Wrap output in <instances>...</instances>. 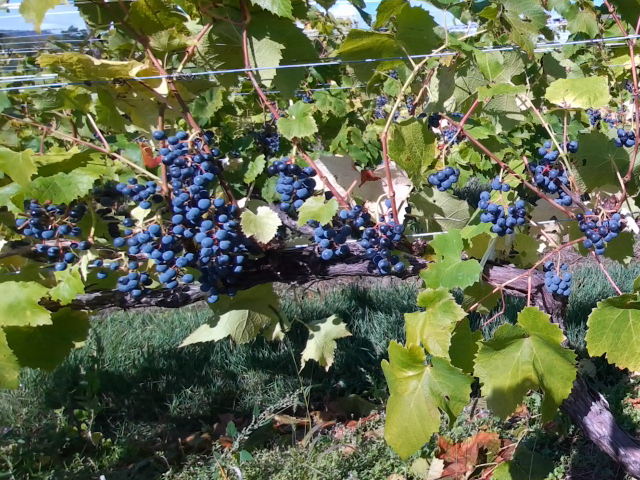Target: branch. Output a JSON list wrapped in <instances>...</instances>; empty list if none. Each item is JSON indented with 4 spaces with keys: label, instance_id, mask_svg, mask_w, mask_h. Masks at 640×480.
Wrapping results in <instances>:
<instances>
[{
    "label": "branch",
    "instance_id": "branch-1",
    "mask_svg": "<svg viewBox=\"0 0 640 480\" xmlns=\"http://www.w3.org/2000/svg\"><path fill=\"white\" fill-rule=\"evenodd\" d=\"M428 61H429V58H423L422 61H420L413 68L411 74L405 80V84L402 85V87L400 89V92H399V96L397 97V100L394 103V106L392 107V111H391L390 116L388 118V122L386 123V125H385V127H384V129L382 131V150H383V154H384V167H385V172H386L388 193H389V197H390V201H391V205H392V213H393V221L394 222H398L399 218H398L397 203H396V199H395V195H394L395 189L393 187L391 169H390V164H389V152H388V148H387V134H388V131L391 128V125L393 124L395 115L397 113V109L399 108V106H400V104L402 102V99L404 98V94H405L408 86L410 85L412 80L415 78V76L418 73V71Z\"/></svg>",
    "mask_w": 640,
    "mask_h": 480
},
{
    "label": "branch",
    "instance_id": "branch-2",
    "mask_svg": "<svg viewBox=\"0 0 640 480\" xmlns=\"http://www.w3.org/2000/svg\"><path fill=\"white\" fill-rule=\"evenodd\" d=\"M438 116L447 119L459 131L464 133L465 136L472 143H474L477 147H479L481 150H483L490 159H492L496 163H499L500 165H502L505 168V170L508 171L515 179H518V180L522 181L530 191L538 194L541 197L542 200L547 202L549 205L561 210L562 212H564L568 216H576V214L573 213L572 211H570L568 208H566L565 206L561 205L560 203L555 202L551 198L547 197L544 194L543 191H541L540 189L534 187L530 183V181L526 179L525 176H522V175L518 174L516 171H514V169L512 167H510V165L507 162H505L501 158H498L496 155H494L484 144H482L474 136H472V134L466 128H464L460 123H458L454 118H452V116L450 114H448L446 112H439Z\"/></svg>",
    "mask_w": 640,
    "mask_h": 480
},
{
    "label": "branch",
    "instance_id": "branch-3",
    "mask_svg": "<svg viewBox=\"0 0 640 480\" xmlns=\"http://www.w3.org/2000/svg\"><path fill=\"white\" fill-rule=\"evenodd\" d=\"M626 42L629 46V57L631 60V76H632V83H633L634 107L636 111V143H635L632 157H631V160L629 161L627 171L624 177V187L620 194V198L617 200L614 206L615 212L619 211L621 204H623L625 201V196L629 188V179H630L634 164L636 163L637 155L640 149V105H639L638 81H637V74H636V58L634 54L633 41L630 38H627Z\"/></svg>",
    "mask_w": 640,
    "mask_h": 480
},
{
    "label": "branch",
    "instance_id": "branch-4",
    "mask_svg": "<svg viewBox=\"0 0 640 480\" xmlns=\"http://www.w3.org/2000/svg\"><path fill=\"white\" fill-rule=\"evenodd\" d=\"M111 155L118 157L121 161L125 162L126 164L130 165L131 167H133L135 170L139 171L140 173L153 178L155 181H157L158 184H160L161 187V195L165 196L166 198V206L168 209L172 208V204H171V188L168 187V181L166 178V173H167V166L164 163L160 164V173H161V178H159L156 175L151 174L150 172L146 171L145 169H143L142 167H140L137 164L132 163L131 161L127 160L126 158H124L123 156H121L118 153L115 152H111Z\"/></svg>",
    "mask_w": 640,
    "mask_h": 480
},
{
    "label": "branch",
    "instance_id": "branch-5",
    "mask_svg": "<svg viewBox=\"0 0 640 480\" xmlns=\"http://www.w3.org/2000/svg\"><path fill=\"white\" fill-rule=\"evenodd\" d=\"M586 239H587V236H584V237H582V238H580V239H577V240H574V241L568 242V243L564 244L563 246L558 247V248H556V249L552 250V251H551V252H549L547 255H545L544 257H542V258H541V259H540L536 264H534V265L532 266V268H531V269L527 270L526 272H524V273L520 274V275H519V276H517V277H514V278H512V279L508 280L506 283H504V284H503V285H501L500 287H498V288H495V289L491 290V291H490L487 295H485V296H484L480 301H478V302H477V303H475L473 306H471L468 310H466V313H471L474 309H476L478 306H480L482 303H484V302H485V301H486V300H487L491 295H493L494 293H496V292H498V291H500V290H503L505 287L509 286L511 283H513V282H515V281H517V280H519V279L523 278L524 276H526V275L530 274L531 272L535 271V269H536V268H537V267H538V266H539V265H540L544 260L548 259V258H549L550 256H552L553 254H555V253L559 252L560 250H563V249L567 248L568 246H571V245H574V244H576V243L582 242V241H584V240H586Z\"/></svg>",
    "mask_w": 640,
    "mask_h": 480
},
{
    "label": "branch",
    "instance_id": "branch-6",
    "mask_svg": "<svg viewBox=\"0 0 640 480\" xmlns=\"http://www.w3.org/2000/svg\"><path fill=\"white\" fill-rule=\"evenodd\" d=\"M102 8L111 17L115 18L117 22L122 24L129 31V33L144 47L147 55L149 56V59L162 73L168 72L167 69L156 59L153 52L151 51V48L149 47V44L137 32L134 31L132 26L126 20L122 19L120 15L113 12L106 4H103Z\"/></svg>",
    "mask_w": 640,
    "mask_h": 480
},
{
    "label": "branch",
    "instance_id": "branch-7",
    "mask_svg": "<svg viewBox=\"0 0 640 480\" xmlns=\"http://www.w3.org/2000/svg\"><path fill=\"white\" fill-rule=\"evenodd\" d=\"M292 142H293V144L297 147V150H298L299 154L301 155L302 159L307 163V165H308L309 167L314 168V169L317 171V174H316V175L318 176V178L320 179V181H321V182H323V183L328 187V189L330 190V192H331V193H333V194L335 195V197L338 199V203H339L340 205H342V208H343V209H348V208H349V205L347 204V201L342 197V195L340 194V192H339V191H337V190L333 187V185L331 184V182H330L329 180H327V179L324 177V175L322 174V172H321L320 168H319L317 165H315V164L311 161V159L306 155V153H305V151H304V149H303V147H302L301 143L297 140V138H296V137H293V138H292Z\"/></svg>",
    "mask_w": 640,
    "mask_h": 480
},
{
    "label": "branch",
    "instance_id": "branch-8",
    "mask_svg": "<svg viewBox=\"0 0 640 480\" xmlns=\"http://www.w3.org/2000/svg\"><path fill=\"white\" fill-rule=\"evenodd\" d=\"M167 82L173 92V95L175 97V99L177 100L180 108L182 109L183 113L185 114V116L187 117V119L189 120V122L192 124L194 130L196 131V133L198 134V138L199 140L202 142V149L206 152V153H210L211 149L205 145L204 143V136H203V131L200 129L199 125L197 124L196 120L193 118L192 114L188 111L185 103L183 102L181 96L178 93L177 87L175 86L174 81L171 78L167 79Z\"/></svg>",
    "mask_w": 640,
    "mask_h": 480
},
{
    "label": "branch",
    "instance_id": "branch-9",
    "mask_svg": "<svg viewBox=\"0 0 640 480\" xmlns=\"http://www.w3.org/2000/svg\"><path fill=\"white\" fill-rule=\"evenodd\" d=\"M1 116H3V117H7V118H10V119H13V120H15V121H19V122L24 123V124H28V125H31V126L39 127V128H41V129H44V130L49 131V132H51V133H55L56 135L63 136V137H65V138H67V139H70V140H72V141L78 142V143H80V144H84V145H87V146H90V147L96 148V149L101 150V151H103V152H108V149H106V148H104V147H101V146L95 145V144L90 143V142L82 141V140H80V139H78V138H75V137H73V136L67 135V134L62 133V132H59V131H57V130H54V129L48 128V127H46V126H44V125H41V124H38V123H33V122H30V121H27V120H23V119H21V118L15 117V116H13V115L5 114V113H1Z\"/></svg>",
    "mask_w": 640,
    "mask_h": 480
},
{
    "label": "branch",
    "instance_id": "branch-10",
    "mask_svg": "<svg viewBox=\"0 0 640 480\" xmlns=\"http://www.w3.org/2000/svg\"><path fill=\"white\" fill-rule=\"evenodd\" d=\"M241 14L243 23V57L245 59V66H250V57L248 55V21L245 2L241 3Z\"/></svg>",
    "mask_w": 640,
    "mask_h": 480
},
{
    "label": "branch",
    "instance_id": "branch-11",
    "mask_svg": "<svg viewBox=\"0 0 640 480\" xmlns=\"http://www.w3.org/2000/svg\"><path fill=\"white\" fill-rule=\"evenodd\" d=\"M246 75L249 77L251 84L255 89V91L257 92V94L265 101V104L267 105L271 113L274 115L276 119H279L280 118L279 112L276 110V108L272 105L270 99L264 94V92L259 87L253 73L251 71H247Z\"/></svg>",
    "mask_w": 640,
    "mask_h": 480
},
{
    "label": "branch",
    "instance_id": "branch-12",
    "mask_svg": "<svg viewBox=\"0 0 640 480\" xmlns=\"http://www.w3.org/2000/svg\"><path fill=\"white\" fill-rule=\"evenodd\" d=\"M604 5H605L606 9L609 11V13L612 15V17H613V19H614V21H615V23H616V25H617V27H618L619 32H620V33H628V32L624 29V27H623V25H622V23H621V21H620V19H619V17H618V14H617V13H616V11L611 7V5H610V3H609V1H608V0H605V1H604Z\"/></svg>",
    "mask_w": 640,
    "mask_h": 480
},
{
    "label": "branch",
    "instance_id": "branch-13",
    "mask_svg": "<svg viewBox=\"0 0 640 480\" xmlns=\"http://www.w3.org/2000/svg\"><path fill=\"white\" fill-rule=\"evenodd\" d=\"M218 180H219V183L222 186L223 190L227 194L231 204L235 205L236 204V200H235V198H234V196L232 194V191L228 188V185L225 183L222 173L218 174Z\"/></svg>",
    "mask_w": 640,
    "mask_h": 480
},
{
    "label": "branch",
    "instance_id": "branch-14",
    "mask_svg": "<svg viewBox=\"0 0 640 480\" xmlns=\"http://www.w3.org/2000/svg\"><path fill=\"white\" fill-rule=\"evenodd\" d=\"M195 49L194 45H191L188 49V51L185 53V55L183 56V58L181 59L178 68L176 69V72H182V70L184 69V65L186 63V61L189 59L190 55L193 53Z\"/></svg>",
    "mask_w": 640,
    "mask_h": 480
},
{
    "label": "branch",
    "instance_id": "branch-15",
    "mask_svg": "<svg viewBox=\"0 0 640 480\" xmlns=\"http://www.w3.org/2000/svg\"><path fill=\"white\" fill-rule=\"evenodd\" d=\"M486 33H487V30L486 29H482V30H479V31H476V32L463 34L462 36L459 37V40L460 41H464L466 39H470V38H473V37H478V36H481V35H485Z\"/></svg>",
    "mask_w": 640,
    "mask_h": 480
},
{
    "label": "branch",
    "instance_id": "branch-16",
    "mask_svg": "<svg viewBox=\"0 0 640 480\" xmlns=\"http://www.w3.org/2000/svg\"><path fill=\"white\" fill-rule=\"evenodd\" d=\"M211 26H212V22L208 21L207 24L203 27V29L200 31V33L196 37L197 42H200L202 40L203 36L206 34V32Z\"/></svg>",
    "mask_w": 640,
    "mask_h": 480
}]
</instances>
